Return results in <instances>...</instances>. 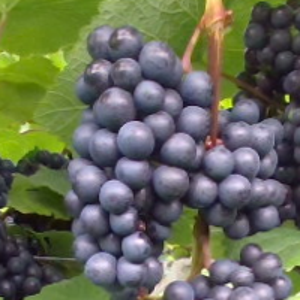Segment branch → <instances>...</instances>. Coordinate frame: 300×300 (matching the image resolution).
<instances>
[{
	"mask_svg": "<svg viewBox=\"0 0 300 300\" xmlns=\"http://www.w3.org/2000/svg\"><path fill=\"white\" fill-rule=\"evenodd\" d=\"M206 27L211 36V50L207 63V73L213 78V126L210 145L217 144L218 107L220 105L221 60L223 57V35H227L233 24L234 14L225 8L222 0H205Z\"/></svg>",
	"mask_w": 300,
	"mask_h": 300,
	"instance_id": "1",
	"label": "branch"
},
{
	"mask_svg": "<svg viewBox=\"0 0 300 300\" xmlns=\"http://www.w3.org/2000/svg\"><path fill=\"white\" fill-rule=\"evenodd\" d=\"M207 239L210 241L209 235V227L204 217L197 216V238H196V256H195V264L194 268H192V273L190 277L187 279V283H190L195 276V274H199L203 266V258H202V240Z\"/></svg>",
	"mask_w": 300,
	"mask_h": 300,
	"instance_id": "2",
	"label": "branch"
}]
</instances>
